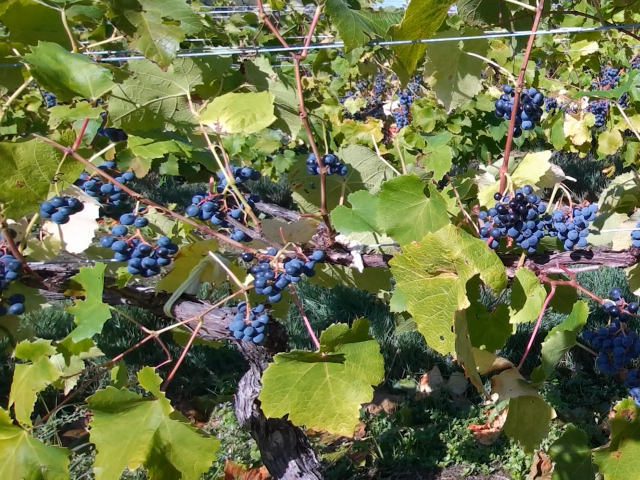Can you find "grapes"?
<instances>
[{"mask_svg":"<svg viewBox=\"0 0 640 480\" xmlns=\"http://www.w3.org/2000/svg\"><path fill=\"white\" fill-rule=\"evenodd\" d=\"M627 384L632 386L629 390V394L635 397V404L640 406V372L630 370L626 374Z\"/></svg>","mask_w":640,"mask_h":480,"instance_id":"grapes-15","label":"grapes"},{"mask_svg":"<svg viewBox=\"0 0 640 480\" xmlns=\"http://www.w3.org/2000/svg\"><path fill=\"white\" fill-rule=\"evenodd\" d=\"M89 178L88 172H83L78 176V180L76 181V186L80 188L81 191H84L86 195H89L93 198L94 201L99 202L100 198L96 195V192L92 189L94 188L96 181L100 182V176H93L92 180H87Z\"/></svg>","mask_w":640,"mask_h":480,"instance_id":"grapes-12","label":"grapes"},{"mask_svg":"<svg viewBox=\"0 0 640 480\" xmlns=\"http://www.w3.org/2000/svg\"><path fill=\"white\" fill-rule=\"evenodd\" d=\"M544 94L538 91L534 87H529L526 91H523L520 96V102L523 104L517 108L515 129L513 136L520 138L523 131H532L535 125L541 121V115L543 109L541 106L544 104Z\"/></svg>","mask_w":640,"mask_h":480,"instance_id":"grapes-7","label":"grapes"},{"mask_svg":"<svg viewBox=\"0 0 640 480\" xmlns=\"http://www.w3.org/2000/svg\"><path fill=\"white\" fill-rule=\"evenodd\" d=\"M640 310L637 302H630L626 306L627 312H620L619 308L612 302H606L603 305V311L606 315L614 317L610 322V328H601L598 333L596 331H585L583 339L598 349L606 352H613L612 362L609 363L608 356L601 353L596 359L599 370L602 373L615 374L618 373L625 363L631 360V357L640 355V337L634 331H628L626 335L623 332L615 333L620 328V321L627 322L629 320L628 313H635Z\"/></svg>","mask_w":640,"mask_h":480,"instance_id":"grapes-3","label":"grapes"},{"mask_svg":"<svg viewBox=\"0 0 640 480\" xmlns=\"http://www.w3.org/2000/svg\"><path fill=\"white\" fill-rule=\"evenodd\" d=\"M84 208L77 199L69 196H54L50 202L39 205V214L43 218L52 219L55 224L66 225L70 222L69 215H75Z\"/></svg>","mask_w":640,"mask_h":480,"instance_id":"grapes-8","label":"grapes"},{"mask_svg":"<svg viewBox=\"0 0 640 480\" xmlns=\"http://www.w3.org/2000/svg\"><path fill=\"white\" fill-rule=\"evenodd\" d=\"M229 169L232 174L235 176L234 181L236 183H241L246 179H250L252 181H259L261 173L259 171H253L250 167H239L234 166L233 164L229 165Z\"/></svg>","mask_w":640,"mask_h":480,"instance_id":"grapes-14","label":"grapes"},{"mask_svg":"<svg viewBox=\"0 0 640 480\" xmlns=\"http://www.w3.org/2000/svg\"><path fill=\"white\" fill-rule=\"evenodd\" d=\"M246 308L245 300L237 303V314L234 316V321L231 323L229 329L233 332L234 338L260 345L265 339L263 331L266 324L270 321V317L267 314H260L264 311L265 306L259 303L248 315V320L251 322V326H248V323L244 321Z\"/></svg>","mask_w":640,"mask_h":480,"instance_id":"grapes-6","label":"grapes"},{"mask_svg":"<svg viewBox=\"0 0 640 480\" xmlns=\"http://www.w3.org/2000/svg\"><path fill=\"white\" fill-rule=\"evenodd\" d=\"M503 92L505 94H502L500 96V99H497L495 101V115L498 118H505L507 121H510L511 109L514 99L513 87L511 85L505 84L503 86Z\"/></svg>","mask_w":640,"mask_h":480,"instance_id":"grapes-10","label":"grapes"},{"mask_svg":"<svg viewBox=\"0 0 640 480\" xmlns=\"http://www.w3.org/2000/svg\"><path fill=\"white\" fill-rule=\"evenodd\" d=\"M322 164L326 167V175H338L340 178H344L348 175L349 169L345 163L338 161V156L334 154H325L322 157Z\"/></svg>","mask_w":640,"mask_h":480,"instance_id":"grapes-11","label":"grapes"},{"mask_svg":"<svg viewBox=\"0 0 640 480\" xmlns=\"http://www.w3.org/2000/svg\"><path fill=\"white\" fill-rule=\"evenodd\" d=\"M122 189L114 186L112 183H104L99 185V193L102 195L109 194L110 201L106 203L107 207H119L122 198Z\"/></svg>","mask_w":640,"mask_h":480,"instance_id":"grapes-13","label":"grapes"},{"mask_svg":"<svg viewBox=\"0 0 640 480\" xmlns=\"http://www.w3.org/2000/svg\"><path fill=\"white\" fill-rule=\"evenodd\" d=\"M97 135L99 138L107 137L110 142H119L126 141L128 139V134L122 129H114V128H106L100 127L97 131Z\"/></svg>","mask_w":640,"mask_h":480,"instance_id":"grapes-16","label":"grapes"},{"mask_svg":"<svg viewBox=\"0 0 640 480\" xmlns=\"http://www.w3.org/2000/svg\"><path fill=\"white\" fill-rule=\"evenodd\" d=\"M534 192L531 184H525L522 189L515 191V197L509 201L510 193L504 195L503 201H509V209L502 202H497L495 207L489 209V216L493 223L488 221L479 230V238L487 241L489 237L498 238L508 234L515 239L516 246L534 254L538 250L539 239L544 237L546 228L550 237H558L559 241H565L563 249L573 250L576 244L579 247H587L590 235L589 222L596 219L598 206L590 204L580 209L574 206L571 209L573 221L562 210H554L550 216L535 221L544 213L546 206L541 202V197Z\"/></svg>","mask_w":640,"mask_h":480,"instance_id":"grapes-1","label":"grapes"},{"mask_svg":"<svg viewBox=\"0 0 640 480\" xmlns=\"http://www.w3.org/2000/svg\"><path fill=\"white\" fill-rule=\"evenodd\" d=\"M216 200V196L210 197L209 193L197 191L196 194L191 197V204L185 208V213L190 217L199 215L201 220L210 219L212 225L222 226L223 228L230 227L233 232L229 234V237L239 242H251L252 238L249 237L247 233H243L242 230L239 231L237 227L224 221L225 213L219 210L220 205L215 202Z\"/></svg>","mask_w":640,"mask_h":480,"instance_id":"grapes-5","label":"grapes"},{"mask_svg":"<svg viewBox=\"0 0 640 480\" xmlns=\"http://www.w3.org/2000/svg\"><path fill=\"white\" fill-rule=\"evenodd\" d=\"M135 173L131 172V173H122L120 176H116L115 180L125 184L126 181H131L134 179Z\"/></svg>","mask_w":640,"mask_h":480,"instance_id":"grapes-19","label":"grapes"},{"mask_svg":"<svg viewBox=\"0 0 640 480\" xmlns=\"http://www.w3.org/2000/svg\"><path fill=\"white\" fill-rule=\"evenodd\" d=\"M305 166L307 167V173L309 175L318 176L320 174L313 152H310L309 157L305 159Z\"/></svg>","mask_w":640,"mask_h":480,"instance_id":"grapes-17","label":"grapes"},{"mask_svg":"<svg viewBox=\"0 0 640 480\" xmlns=\"http://www.w3.org/2000/svg\"><path fill=\"white\" fill-rule=\"evenodd\" d=\"M324 253L322 250H316L308 257L306 263L302 259H291L284 257L282 259L283 268L286 272L277 274L278 280L274 285H267L268 280H273L276 271L270 265L268 259H262L258 266H252L250 272L254 274L255 294L257 296H268L271 303H279L282 300V294L288 284L298 283L302 276L314 277L316 275L315 265L324 261Z\"/></svg>","mask_w":640,"mask_h":480,"instance_id":"grapes-4","label":"grapes"},{"mask_svg":"<svg viewBox=\"0 0 640 480\" xmlns=\"http://www.w3.org/2000/svg\"><path fill=\"white\" fill-rule=\"evenodd\" d=\"M136 208L131 209V213H125L119 217V223L112 228L113 236H103L100 240L102 248H110L114 253V258L120 262H127V272L130 275H141L144 279H148L153 275H159L163 266L172 263V258L168 254H175L178 251V245L172 243L168 236H160L157 239L156 252L151 254V246L144 244L138 238H133L131 243L133 246L130 251L127 250L128 244L124 240L115 241L114 237H123L128 233L126 226L147 227L149 220L144 216H136Z\"/></svg>","mask_w":640,"mask_h":480,"instance_id":"grapes-2","label":"grapes"},{"mask_svg":"<svg viewBox=\"0 0 640 480\" xmlns=\"http://www.w3.org/2000/svg\"><path fill=\"white\" fill-rule=\"evenodd\" d=\"M21 265L22 262L19 259H15L10 254L4 255V250L0 248V292L6 289L9 281L19 275Z\"/></svg>","mask_w":640,"mask_h":480,"instance_id":"grapes-9","label":"grapes"},{"mask_svg":"<svg viewBox=\"0 0 640 480\" xmlns=\"http://www.w3.org/2000/svg\"><path fill=\"white\" fill-rule=\"evenodd\" d=\"M218 179H219V181L221 182V184H217V185H216V191H217L218 193H222V191L225 189V185H226V183H227V182H226V178L223 176V174H222V173H219V174H218Z\"/></svg>","mask_w":640,"mask_h":480,"instance_id":"grapes-20","label":"grapes"},{"mask_svg":"<svg viewBox=\"0 0 640 480\" xmlns=\"http://www.w3.org/2000/svg\"><path fill=\"white\" fill-rule=\"evenodd\" d=\"M244 207L239 203V209H231L227 211L228 215L235 217L236 219L242 220Z\"/></svg>","mask_w":640,"mask_h":480,"instance_id":"grapes-18","label":"grapes"}]
</instances>
